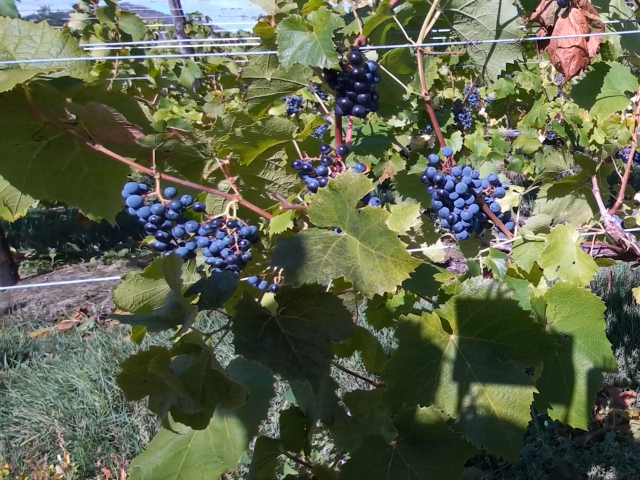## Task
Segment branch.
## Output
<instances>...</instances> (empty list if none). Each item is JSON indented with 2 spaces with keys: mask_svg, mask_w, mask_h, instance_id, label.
<instances>
[{
  "mask_svg": "<svg viewBox=\"0 0 640 480\" xmlns=\"http://www.w3.org/2000/svg\"><path fill=\"white\" fill-rule=\"evenodd\" d=\"M87 145L94 151L106 155L114 160H117L120 163L125 164L126 166L138 170L140 172H143L153 178L158 179L159 181L162 182H170L173 184H177V185H181L187 189L190 190H194V191H199V192H203V193H207L209 195L215 196L217 198H221L227 201H232V202H238L239 204L245 206L247 209L255 212L256 214L261 215L264 218H267L268 220H271L273 218V214L257 205H255L254 203L250 202L249 200H247L246 198L242 197L241 195H234V194H229L226 193L224 191H220L217 190L215 188H211L209 186L206 185H202V184H196V183H192L186 179L183 178H179V177H175L173 175H165L162 174L159 171L153 170L143 164L137 163L131 159H129L128 157L122 156L121 154L108 149L107 147L102 146V144L100 142L94 143L92 140H89L87 142Z\"/></svg>",
  "mask_w": 640,
  "mask_h": 480,
  "instance_id": "obj_1",
  "label": "branch"
},
{
  "mask_svg": "<svg viewBox=\"0 0 640 480\" xmlns=\"http://www.w3.org/2000/svg\"><path fill=\"white\" fill-rule=\"evenodd\" d=\"M639 113H640V96L636 97V103H635V111H634V123H633V129H632V133H631V142H630V147H631V152L629 155V161L627 164H625V168H624V173L621 179V188H620V192L618 195V198L615 202V204L613 205V207L611 208V210L609 211L610 215H614L617 211V209L619 208L624 195H625V191H626V181L628 179L629 176V170L632 164V159L634 157V153H635V144H636V136H637V132H638V125H639Z\"/></svg>",
  "mask_w": 640,
  "mask_h": 480,
  "instance_id": "obj_2",
  "label": "branch"
},
{
  "mask_svg": "<svg viewBox=\"0 0 640 480\" xmlns=\"http://www.w3.org/2000/svg\"><path fill=\"white\" fill-rule=\"evenodd\" d=\"M417 65H418V71H419V77H420V83H421V90H422V99L425 102V107L429 112V117H430V122L433 125V127L435 128L436 132H437V136H438V140L439 143L442 147L446 146V142L444 141V137H443V133L442 130L440 128V126L438 125L436 119H435V114H434V109L431 106V101L428 97V92H427V88H426V81H425V74H424V69H423V62H422V48H417Z\"/></svg>",
  "mask_w": 640,
  "mask_h": 480,
  "instance_id": "obj_3",
  "label": "branch"
},
{
  "mask_svg": "<svg viewBox=\"0 0 640 480\" xmlns=\"http://www.w3.org/2000/svg\"><path fill=\"white\" fill-rule=\"evenodd\" d=\"M474 200L479 204V206L483 209V211L489 216V218L505 233V235L509 238H513L514 234L510 232V230L496 218L492 211L486 206V204L482 201L479 196H475Z\"/></svg>",
  "mask_w": 640,
  "mask_h": 480,
  "instance_id": "obj_4",
  "label": "branch"
},
{
  "mask_svg": "<svg viewBox=\"0 0 640 480\" xmlns=\"http://www.w3.org/2000/svg\"><path fill=\"white\" fill-rule=\"evenodd\" d=\"M438 4H439V0H434L432 2V5H431V8H430L429 12L427 13L425 18L423 19L422 26H421V29L419 31L418 37H417V43H422L423 36H424V34L426 32L428 21L433 16Z\"/></svg>",
  "mask_w": 640,
  "mask_h": 480,
  "instance_id": "obj_5",
  "label": "branch"
}]
</instances>
